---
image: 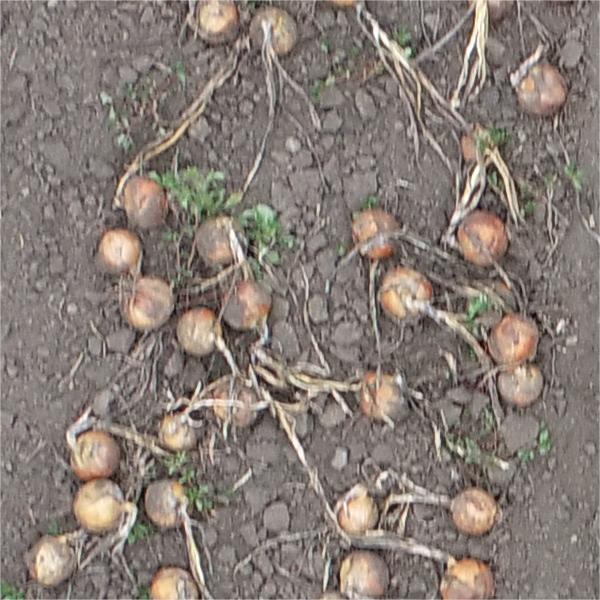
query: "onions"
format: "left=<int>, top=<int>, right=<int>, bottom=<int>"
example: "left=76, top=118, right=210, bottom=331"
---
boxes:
left=468, top=0, right=514, bottom=17
left=317, top=590, right=348, bottom=600
left=449, top=488, right=495, bottom=536
left=148, top=568, right=201, bottom=599
left=221, top=280, right=270, bottom=328
left=328, top=0, right=359, bottom=8
left=250, top=7, right=295, bottom=54
left=73, top=479, right=122, bottom=530
left=352, top=204, right=400, bottom=247
left=358, top=369, right=405, bottom=420
left=27, top=536, right=74, bottom=583
left=194, top=219, right=241, bottom=264
left=140, top=479, right=186, bottom=525
left=497, top=363, right=542, bottom=403
left=123, top=275, right=170, bottom=328
left=456, top=132, right=480, bottom=165
left=207, top=384, right=248, bottom=427
left=176, top=308, right=220, bottom=355
left=339, top=550, right=390, bottom=596
left=71, top=431, right=118, bottom=477
left=455, top=211, right=507, bottom=262
left=156, top=412, right=195, bottom=449
left=193, top=2, right=239, bottom=42
left=442, top=558, right=494, bottom=596
left=336, top=489, right=375, bottom=532
left=96, top=228, right=140, bottom=270
left=487, top=316, right=538, bottom=363
left=122, top=176, right=168, bottom=229
left=512, top=61, right=566, bottom=113
left=380, top=267, right=431, bottom=319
